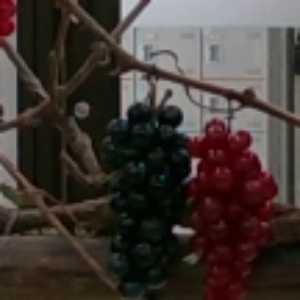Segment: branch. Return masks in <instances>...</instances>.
<instances>
[{
    "label": "branch",
    "instance_id": "1",
    "mask_svg": "<svg viewBox=\"0 0 300 300\" xmlns=\"http://www.w3.org/2000/svg\"><path fill=\"white\" fill-rule=\"evenodd\" d=\"M151 1L152 0H140L121 24L109 33L89 12L78 5L77 0H62L57 35L54 39L53 50L49 52L52 66L53 95L47 93L42 81L34 75L24 61L20 59L9 42H3L1 44L3 53L8 57L12 65L16 67L22 77L31 85L39 104L34 108L27 109L19 117L1 123L0 133H6L41 118H48L53 125L60 130V198L44 189L34 187L3 153H0V166L30 196L34 205L48 218L56 229L67 238L73 249L81 254L83 259L90 266L95 277L107 285L116 295L121 294L119 292V286L113 277L94 261L74 235L47 208L43 200V198H45L58 206H64L68 202L67 165L80 180L92 184V186L104 196L114 195L118 192V187L113 184L111 177L105 175L99 166L96 156L92 151V143L89 136L82 133L76 122V118L74 116H68L66 113V97L74 93L82 82L90 76L94 68L107 53L111 55L116 64V68L109 72L111 77H116L130 69H134L145 75H159L166 80L180 83L187 87L220 95L223 98L230 97L232 100H237L243 108H254L261 113L271 115L300 128V115L262 100L256 96L251 88H246L243 92H239L237 89H224L223 87L212 86L191 78L174 75L169 71L161 70L158 66L141 62L129 55L126 49L120 45L116 39L133 23L141 11ZM72 14H75L84 21L98 39L97 46L88 56L87 61L84 62L78 71L67 81L65 45ZM68 143H70L79 154L88 174L83 173L68 154Z\"/></svg>",
    "mask_w": 300,
    "mask_h": 300
}]
</instances>
